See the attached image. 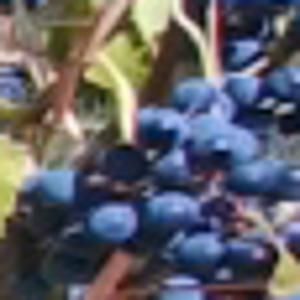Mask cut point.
<instances>
[{"instance_id": "6a23745f", "label": "cut point", "mask_w": 300, "mask_h": 300, "mask_svg": "<svg viewBox=\"0 0 300 300\" xmlns=\"http://www.w3.org/2000/svg\"><path fill=\"white\" fill-rule=\"evenodd\" d=\"M93 56L115 77L120 120L123 126V141L127 147H134L136 145L138 110V91L135 83L126 72H123L120 67L104 55L101 48H95Z\"/></svg>"}, {"instance_id": "7d7e1d6f", "label": "cut point", "mask_w": 300, "mask_h": 300, "mask_svg": "<svg viewBox=\"0 0 300 300\" xmlns=\"http://www.w3.org/2000/svg\"><path fill=\"white\" fill-rule=\"evenodd\" d=\"M172 16L181 27H184L187 32H190L192 34V37L196 42V47L202 57L205 78L208 82H213L215 80V73L214 68L212 67V56L209 48L205 43V38L200 28L184 17L180 9L179 1H174L172 3Z\"/></svg>"}]
</instances>
